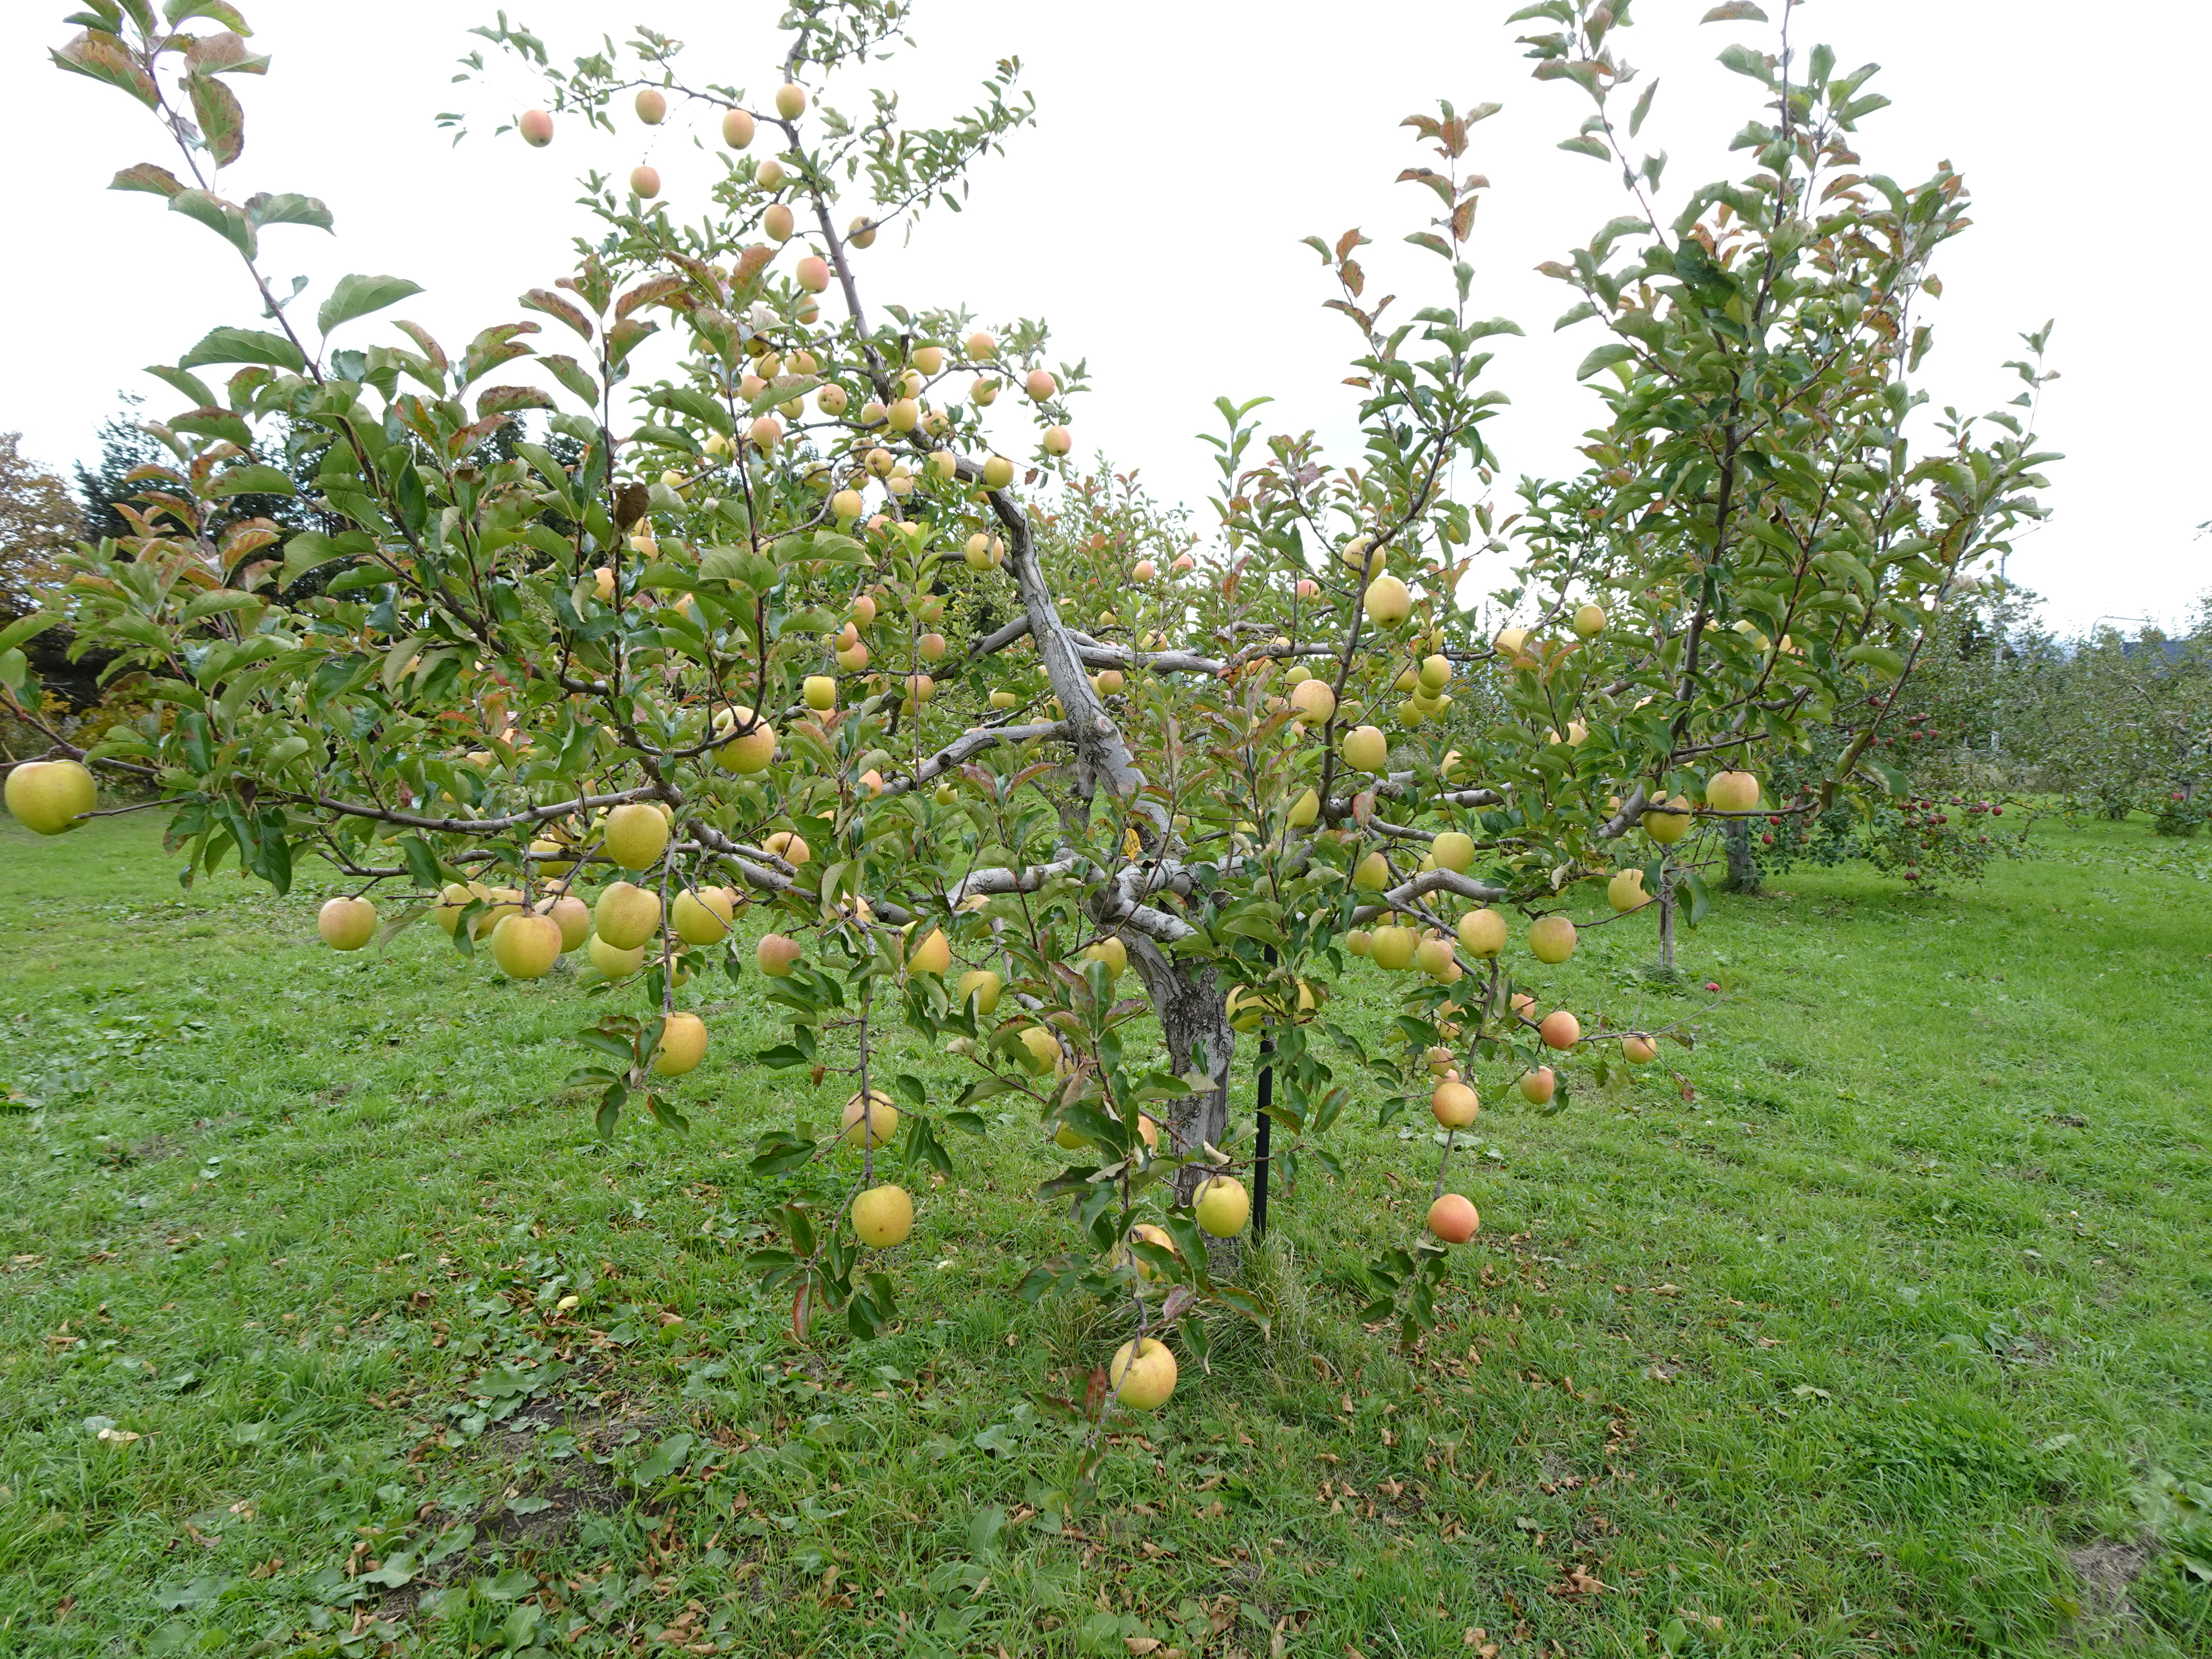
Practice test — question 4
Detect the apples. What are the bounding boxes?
[722,108,755,150]
[764,204,794,241]
[318,896,377,951]
[1091,676,1105,699]
[1082,935,1127,980]
[544,880,573,899]
[802,676,836,710]
[1433,695,1455,718]
[745,330,770,357]
[1421,927,1442,940]
[1290,679,1335,728]
[474,806,485,813]
[843,595,876,628]
[1112,1224,1175,1287]
[732,432,751,461]
[892,521,919,542]
[1346,930,1371,956]
[655,952,690,988]
[831,489,863,519]
[1641,790,1691,844]
[737,374,768,403]
[750,417,782,448]
[1269,636,1290,647]
[842,1090,898,1150]
[761,446,774,460]
[887,477,913,505]
[1018,1027,1062,1076]
[778,395,804,420]
[1246,659,1273,675]
[1417,618,1444,656]
[921,595,942,622]
[796,256,830,294]
[934,783,958,806]
[1342,726,1387,772]
[1706,771,1759,820]
[1407,927,1421,950]
[381,835,398,847]
[1445,522,1463,544]
[501,728,529,757]
[1236,809,1263,834]
[1405,871,1424,882]
[762,832,810,867]
[1043,425,1071,457]
[1432,1082,1479,1129]
[1054,1120,1087,1149]
[955,894,993,938]
[707,265,728,283]
[1142,630,1167,652]
[1397,699,1423,727]
[901,697,923,716]
[635,90,666,125]
[862,584,889,611]
[1393,668,1418,692]
[912,346,942,375]
[716,382,739,399]
[912,467,927,491]
[1599,796,1620,818]
[803,461,830,489]
[860,673,889,697]
[696,337,717,355]
[1422,891,1437,907]
[582,778,597,796]
[1087,674,1094,688]
[1519,1065,1554,1104]
[983,455,1014,489]
[630,166,660,199]
[722,885,750,918]
[1438,1021,1460,1042]
[904,675,934,702]
[881,424,901,444]
[465,866,482,878]
[756,933,801,977]
[886,465,913,486]
[1141,678,1165,691]
[1297,579,1320,605]
[908,758,927,770]
[1110,1337,1177,1410]
[989,687,1015,710]
[1342,537,1386,582]
[1055,1051,1084,1082]
[1441,750,1471,784]
[1038,665,1052,684]
[1172,554,1193,570]
[1574,604,1606,638]
[1285,666,1312,693]
[895,369,920,399]
[1363,659,1379,680]
[434,881,497,941]
[775,83,806,120]
[491,912,562,978]
[466,752,491,767]
[1554,840,1569,853]
[1731,619,1769,652]
[1427,1194,1479,1244]
[395,655,419,683]
[441,791,455,803]
[1432,832,1475,874]
[1363,576,1410,629]
[851,1185,913,1249]
[529,834,575,877]
[593,567,615,602]
[710,706,775,774]
[1458,908,1507,959]
[489,886,532,934]
[970,378,998,407]
[1608,869,1654,914]
[1059,598,1077,607]
[1025,369,1055,402]
[1412,685,1440,710]
[1622,1031,1656,1064]
[1028,748,1040,759]
[1703,617,1719,633]
[1509,993,1535,1020]
[532,896,590,953]
[823,621,857,652]
[1354,852,1388,892]
[1474,804,1498,814]
[846,468,870,490]
[753,351,781,379]
[1433,1068,1459,1088]
[660,931,690,954]
[866,514,897,540]
[1438,1000,1466,1023]
[594,881,661,950]
[627,536,658,567]
[918,633,946,660]
[958,970,1001,1015]
[1435,808,1455,822]
[836,642,868,672]
[1138,1115,1157,1154]
[1426,1046,1453,1075]
[673,593,694,619]
[589,931,644,979]
[660,469,693,502]
[1225,985,1269,1033]
[964,727,985,735]
[1540,884,1569,898]
[861,402,890,433]
[1283,790,1320,828]
[550,814,578,849]
[965,332,996,361]
[630,516,652,537]
[785,350,817,375]
[1550,722,1587,746]
[755,160,786,192]
[927,451,956,482]
[1340,699,1362,708]
[1376,910,1400,928]
[1267,977,1315,1025]
[1370,925,1414,969]
[658,803,670,818]
[1496,628,1527,655]
[539,705,555,716]
[1133,560,1154,583]
[671,885,733,945]
[1252,715,1260,728]
[901,920,951,977]
[795,295,818,324]
[1030,717,1053,725]
[864,448,893,478]
[4,760,98,835]
[1432,961,1463,984]
[855,769,883,802]
[1290,720,1305,740]
[1418,654,1451,689]
[1043,695,1067,722]
[969,491,991,505]
[1193,1176,1250,1238]
[474,653,498,672]
[1418,678,1444,700]
[1172,814,1190,832]
[601,726,619,737]
[848,216,876,249]
[540,711,557,732]
[1633,695,1667,720]
[967,533,1004,571]
[578,806,611,858]
[1417,850,1432,871]
[1417,938,1453,974]
[1097,670,1123,695]
[651,1012,707,1077]
[604,804,668,870]
[1569,716,1588,732]
[1540,1011,1580,1050]
[850,437,876,463]
[817,384,847,416]
[921,409,950,439]
[809,707,837,726]
[1528,916,1576,964]
[1099,607,1119,626]
[1423,853,1438,872]
[816,810,835,823]
[886,397,918,432]
[1593,867,1605,875]
[825,891,872,938]
[1763,634,1803,665]
[705,433,737,463]
[519,109,554,147]
[1265,696,1289,714]
[1510,851,1540,874]
[757,536,778,559]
